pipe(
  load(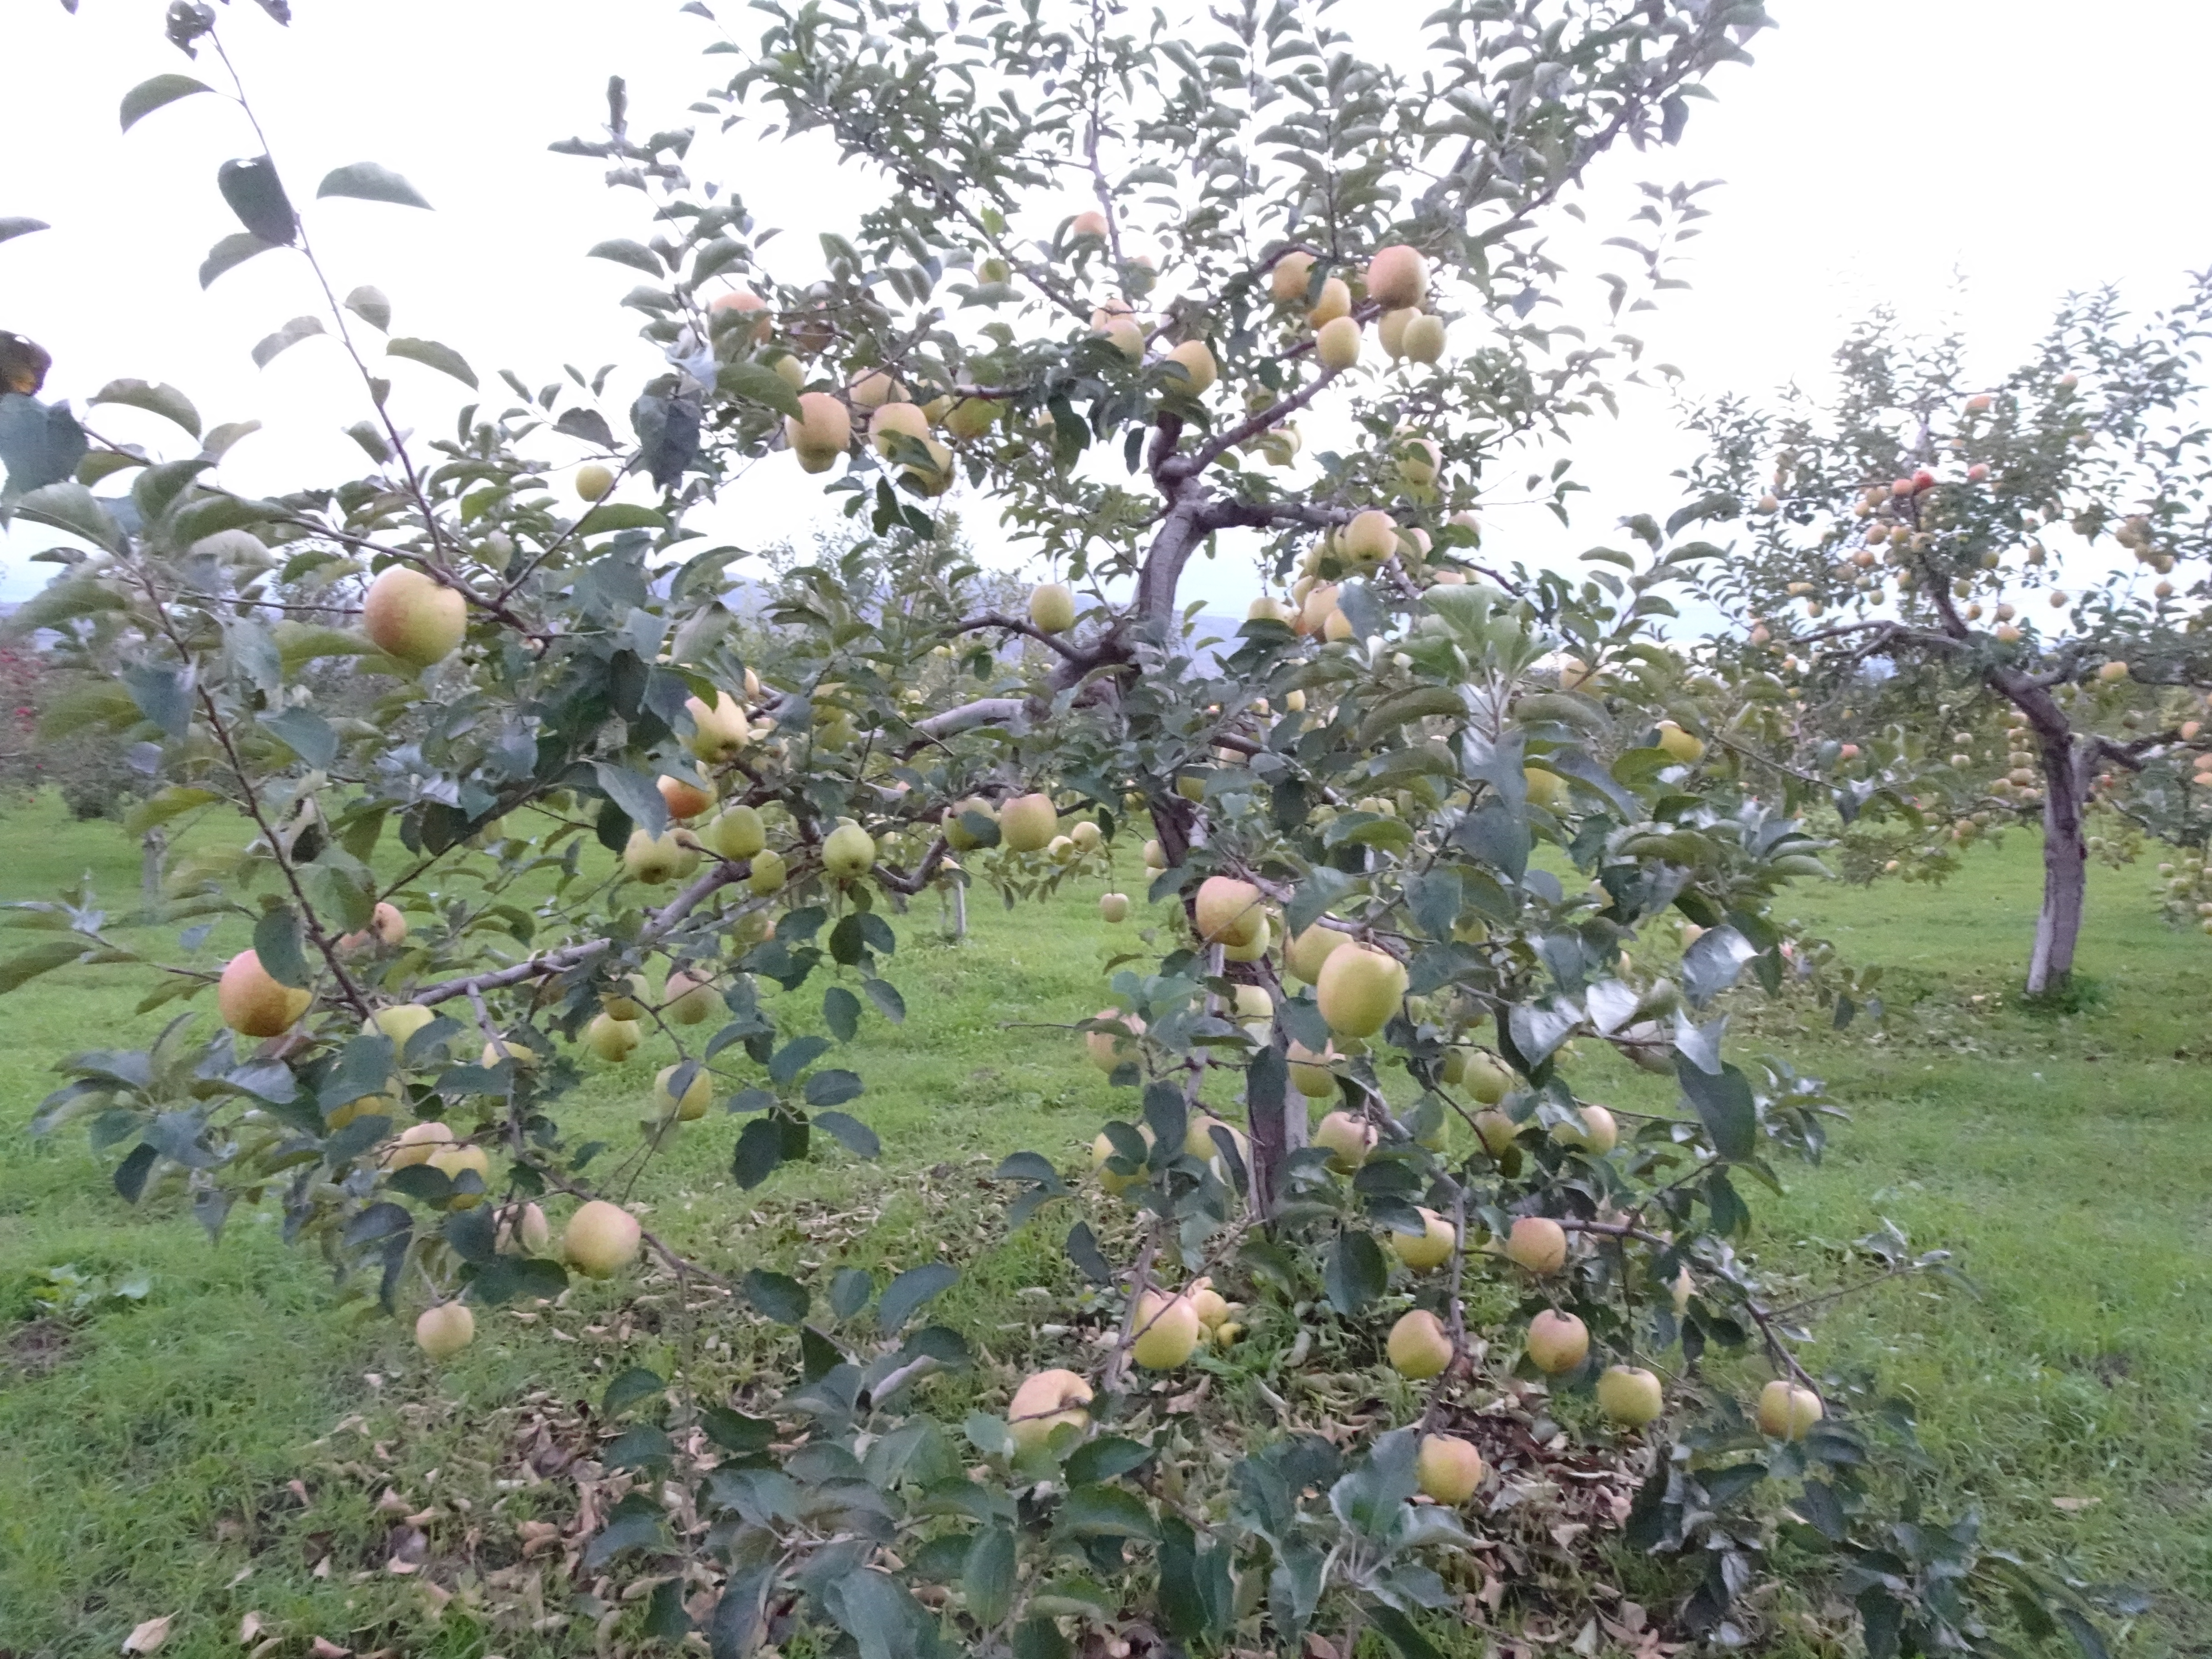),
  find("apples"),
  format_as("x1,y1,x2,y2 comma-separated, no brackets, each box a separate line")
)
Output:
1387,1309,1454,1379
1528,1309,1589,1374
1164,340,1217,397
1506,1217,1566,1274
1523,767,1557,806
1366,245,1429,310
821,825,875,878
1324,608,1352,642
1245,381,1280,418
928,856,961,887
1432,571,1467,585
942,797,995,851
1395,438,1441,486
563,1200,641,1280
1186,1276,1215,1300
1553,1105,1617,1157
1272,251,1317,302
1415,1109,1450,1153
915,378,946,428
1451,915,1489,944
1131,1290,1199,1370
1140,807,1151,815
382,1141,405,1172
1071,821,1101,852
1285,689,1306,712
1307,277,1351,330
1047,835,1074,864
1397,527,1432,560
664,968,717,1024
1281,604,1296,628
1304,542,1331,578
834,816,860,826
1008,1369,1094,1461
1143,840,1168,869
674,690,749,765
867,402,929,462
744,668,759,702
1462,1051,1513,1104
1090,299,1138,331
1073,211,1109,242
1222,917,1270,963
401,1122,454,1166
1247,597,1284,621
600,973,651,1021
902,439,952,496
1193,1321,1213,1351
1316,942,1407,1037
709,805,765,861
1651,720,1703,763
744,728,791,776
1292,575,1327,609
774,354,806,391
810,682,852,725
1092,1125,1156,1197
1284,918,1354,985
1324,523,1349,562
799,301,828,352
623,828,678,885
941,384,994,441
1474,1109,1516,1157
1248,698,1271,727
1177,762,1219,804
1195,876,1264,947
796,449,836,474
1589,879,1615,909
415,1304,474,1357
1666,1265,1691,1313
481,1033,543,1070
1190,1289,1229,1330
667,827,702,879
1434,1034,1472,1084
341,902,406,949
1313,1111,1379,1171
753,920,777,941
1316,316,1361,370
364,559,468,667
1552,1040,1574,1064
424,1143,491,1210
1392,425,1418,441
1100,893,1129,922
1211,745,1247,769
749,849,786,896
1614,950,1631,971
1450,992,1485,1028
1683,924,1704,948
1185,1116,1249,1193
1378,306,1423,358
1561,659,1601,698
1000,793,1057,852
1098,319,1145,358
1087,1008,1147,1075
1303,585,1340,632
1286,1036,1345,1097
1417,1433,1482,1505
360,1003,436,1066
1216,1323,1242,1348
1037,410,1057,444
1402,315,1447,363
1758,1380,1822,1442
1597,1365,1663,1428
1447,512,1481,535
1306,804,1339,830
1145,866,1168,879
1030,584,1075,634
575,465,614,502
784,392,851,460
1392,1206,1455,1270
896,780,912,792
743,701,770,730
1334,524,1353,564
1126,256,1157,293
1356,797,1396,816
1280,424,1302,452
1780,942,1791,957
588,1012,641,1061
1263,428,1298,465
654,1063,712,1121
849,368,901,413
1346,511,1398,564
978,259,1011,287
492,1201,549,1257
709,292,771,346
1126,779,1146,804
219,949,313,1037
1286,606,1309,635
330,1095,381,1129
656,760,717,819
1460,566,1482,584
1219,983,1273,1028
